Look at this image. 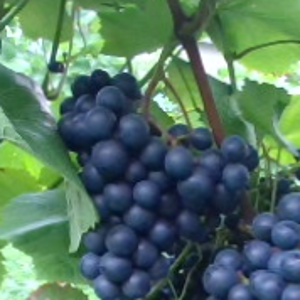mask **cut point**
<instances>
[{
    "instance_id": "cut-point-1",
    "label": "cut point",
    "mask_w": 300,
    "mask_h": 300,
    "mask_svg": "<svg viewBox=\"0 0 300 300\" xmlns=\"http://www.w3.org/2000/svg\"><path fill=\"white\" fill-rule=\"evenodd\" d=\"M162 81L165 87L167 88L170 96L174 99L180 114L182 115V118L184 120L185 126L187 127L188 131H193L194 126L192 123V120L190 118V115L187 111V108L180 97V95L177 93L174 85L170 81V79L166 75H162L159 77L158 75H155L151 81L148 84L147 90L144 94V99H143V120L145 122H149L151 120V114H150V102H151V97L154 93V89L156 85L158 84L159 81Z\"/></svg>"
}]
</instances>
